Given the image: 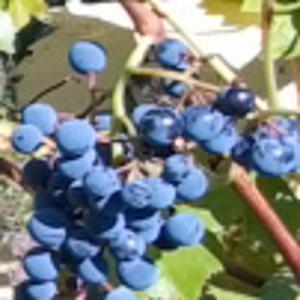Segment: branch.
<instances>
[{
    "label": "branch",
    "instance_id": "1",
    "mask_svg": "<svg viewBox=\"0 0 300 300\" xmlns=\"http://www.w3.org/2000/svg\"><path fill=\"white\" fill-rule=\"evenodd\" d=\"M234 176L236 178L232 181L233 188L245 201V205L267 234L273 239L292 272L300 277V239L290 231L267 197L242 167H237L234 170Z\"/></svg>",
    "mask_w": 300,
    "mask_h": 300
},
{
    "label": "branch",
    "instance_id": "2",
    "mask_svg": "<svg viewBox=\"0 0 300 300\" xmlns=\"http://www.w3.org/2000/svg\"><path fill=\"white\" fill-rule=\"evenodd\" d=\"M120 5L130 16L139 37L148 34L155 42L166 39L165 24L150 4L143 0H120Z\"/></svg>",
    "mask_w": 300,
    "mask_h": 300
}]
</instances>
